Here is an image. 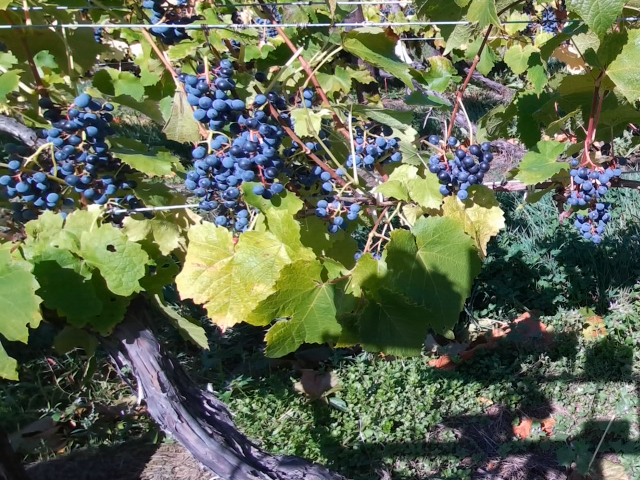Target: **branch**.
Here are the masks:
<instances>
[{
	"label": "branch",
	"instance_id": "1",
	"mask_svg": "<svg viewBox=\"0 0 640 480\" xmlns=\"http://www.w3.org/2000/svg\"><path fill=\"white\" fill-rule=\"evenodd\" d=\"M265 107L267 108V110L269 111V113L272 115L273 119L275 120L276 124L282 128L286 134L289 136V138L295 142H298L299 148L301 150L304 151V153L311 159H313L315 162H317L319 164V166L327 171L328 173H330L332 175V177L335 179L337 184H340L341 186H345V190L347 192H352L353 188L350 187L349 185H346V182L341 179L338 174L328 165H326L317 155L313 154L306 145H304L303 143V139L301 137H297V135L294 133V131L292 130V128L285 122L282 120L281 116L279 115L278 111L276 110V108L270 103L267 102L265 104Z\"/></svg>",
	"mask_w": 640,
	"mask_h": 480
},
{
	"label": "branch",
	"instance_id": "2",
	"mask_svg": "<svg viewBox=\"0 0 640 480\" xmlns=\"http://www.w3.org/2000/svg\"><path fill=\"white\" fill-rule=\"evenodd\" d=\"M491 30H492V26L488 25L487 28L485 29L483 35H482L481 40H480V46L478 47V50H477L476 54L474 55V58H473L471 64L469 65V67H468V69L466 71L463 85L460 87V89L458 91V94L455 97V101H454L453 106H452V114H451V116L449 118V123H448L447 129H446V136L447 137H451L452 136L451 132H452V129H453L454 121H455L456 116H457L458 105L460 103V100H461L464 92L467 90V87H468V84H469V81H470V77H471V73H472L473 69L475 68V66H476V64H477L482 52L485 50V43H486L487 37H488L489 33L491 32Z\"/></svg>",
	"mask_w": 640,
	"mask_h": 480
},
{
	"label": "branch",
	"instance_id": "3",
	"mask_svg": "<svg viewBox=\"0 0 640 480\" xmlns=\"http://www.w3.org/2000/svg\"><path fill=\"white\" fill-rule=\"evenodd\" d=\"M140 32V36L142 37V39L148 44L150 50L153 52L154 56L160 61L162 62V64L165 66V68L167 69L168 73L171 75V79L172 82L174 83V85L178 88V90L181 93V96L184 99H187L189 97V93L186 89V87L184 86V84L180 81L178 74L176 73L175 68L172 66V64L170 63V61L164 56L162 55V53L160 52V50L158 49V47L156 46L154 40L148 35L147 30L144 28H140L139 29Z\"/></svg>",
	"mask_w": 640,
	"mask_h": 480
},
{
	"label": "branch",
	"instance_id": "4",
	"mask_svg": "<svg viewBox=\"0 0 640 480\" xmlns=\"http://www.w3.org/2000/svg\"><path fill=\"white\" fill-rule=\"evenodd\" d=\"M16 36L21 40L22 44H23V50L26 56V59L29 63V67L32 73V76L34 78V80L37 83V87H38V91L42 96H45L47 94V91L45 89V85H44V81L38 71L37 65H36V61L33 57L31 48H30V42L28 40V37L23 33V31L21 29H17L15 31Z\"/></svg>",
	"mask_w": 640,
	"mask_h": 480
},
{
	"label": "branch",
	"instance_id": "5",
	"mask_svg": "<svg viewBox=\"0 0 640 480\" xmlns=\"http://www.w3.org/2000/svg\"><path fill=\"white\" fill-rule=\"evenodd\" d=\"M599 100H600V87L596 86L595 87L594 103H593V107H592V113H591V117L589 119L587 132H586L584 145H583V150H582V154H581V164L582 165L586 164V157H587V153H588V148H589L590 138H591V134H592V129H593V126H594L596 115H597Z\"/></svg>",
	"mask_w": 640,
	"mask_h": 480
},
{
	"label": "branch",
	"instance_id": "6",
	"mask_svg": "<svg viewBox=\"0 0 640 480\" xmlns=\"http://www.w3.org/2000/svg\"><path fill=\"white\" fill-rule=\"evenodd\" d=\"M298 60L301 62V64L303 65L304 69L306 70L309 80L313 83L314 90L319 95V97L323 101L324 105L325 106H329L330 102L328 101L327 97L325 96V94L320 89L319 83H318L317 79L314 77V75L312 73V70H311L310 66L308 65V63L306 62V60L303 58L302 55L298 56Z\"/></svg>",
	"mask_w": 640,
	"mask_h": 480
},
{
	"label": "branch",
	"instance_id": "7",
	"mask_svg": "<svg viewBox=\"0 0 640 480\" xmlns=\"http://www.w3.org/2000/svg\"><path fill=\"white\" fill-rule=\"evenodd\" d=\"M332 117H333V121L335 122L336 126L338 127V128H337V131H338V132H341V133H342V135H343L344 137H346L348 140H351V139H352V136H351V135L346 131V129L344 128V126L341 124V122H340V120H339V118H338V115H337V112H336V111H333V112H332Z\"/></svg>",
	"mask_w": 640,
	"mask_h": 480
},
{
	"label": "branch",
	"instance_id": "8",
	"mask_svg": "<svg viewBox=\"0 0 640 480\" xmlns=\"http://www.w3.org/2000/svg\"><path fill=\"white\" fill-rule=\"evenodd\" d=\"M277 31L284 37V39L286 40L287 44L289 45L291 51L293 53H296L297 52V48H296L295 44L293 43V41H292L291 37L289 36V34L287 32H285L284 29L277 30Z\"/></svg>",
	"mask_w": 640,
	"mask_h": 480
},
{
	"label": "branch",
	"instance_id": "9",
	"mask_svg": "<svg viewBox=\"0 0 640 480\" xmlns=\"http://www.w3.org/2000/svg\"><path fill=\"white\" fill-rule=\"evenodd\" d=\"M521 3H522V0H516V1H513V2H511V3H509V4L505 5V6L501 7V8L498 10V12H497V16H498V17H501V16H502V14H503L505 11H508V10H510L511 8H514L515 6H518V5H520Z\"/></svg>",
	"mask_w": 640,
	"mask_h": 480
},
{
	"label": "branch",
	"instance_id": "10",
	"mask_svg": "<svg viewBox=\"0 0 640 480\" xmlns=\"http://www.w3.org/2000/svg\"><path fill=\"white\" fill-rule=\"evenodd\" d=\"M261 9L263 13L266 15V17L268 18V20L270 21V24L276 25L277 21L274 19V17L272 16L271 12L267 9V7L265 5H262Z\"/></svg>",
	"mask_w": 640,
	"mask_h": 480
}]
</instances>
